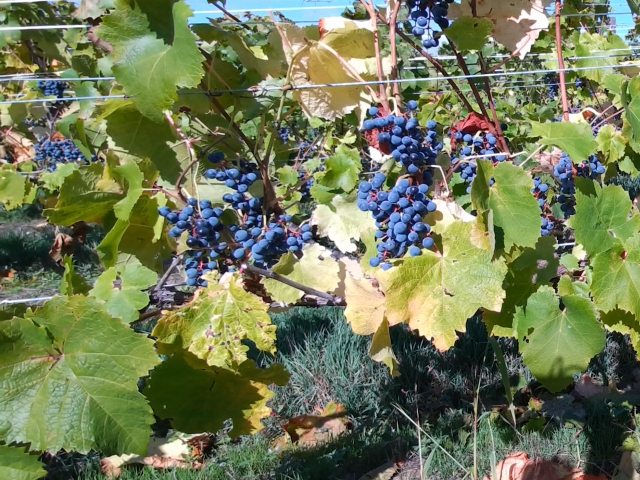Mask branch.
<instances>
[{"instance_id": "obj_10", "label": "branch", "mask_w": 640, "mask_h": 480, "mask_svg": "<svg viewBox=\"0 0 640 480\" xmlns=\"http://www.w3.org/2000/svg\"><path fill=\"white\" fill-rule=\"evenodd\" d=\"M446 39H447V40H448V42L450 43V46L452 47V49H453V51H454V53H455V55H456V58H457V60H458V61H459V63H460V69L464 72V74H470L469 67H468V65L466 64V62L464 61V59H463L462 55H461L460 53H458V54H457V52H456V50H455L456 46H454L453 42H452V41H450V40L447 38V36H446Z\"/></svg>"}, {"instance_id": "obj_3", "label": "branch", "mask_w": 640, "mask_h": 480, "mask_svg": "<svg viewBox=\"0 0 640 480\" xmlns=\"http://www.w3.org/2000/svg\"><path fill=\"white\" fill-rule=\"evenodd\" d=\"M468 83L471 86V89L473 91V95L476 98V101L478 103V105L480 106V109L482 110L483 114L485 115L487 121H488V125H489V133L493 135V137L497 140L496 143V148L498 150H500L503 154H509L510 150L505 142L504 136H503V132L501 130V122L497 117V113H496V105L493 99V94L491 92V86L489 84V77L488 78H484V86L486 89V94L488 96V101L491 107V115L488 111V109L486 108L485 104L482 101V98L478 92V88L475 84V82L472 79L468 80Z\"/></svg>"}, {"instance_id": "obj_7", "label": "branch", "mask_w": 640, "mask_h": 480, "mask_svg": "<svg viewBox=\"0 0 640 480\" xmlns=\"http://www.w3.org/2000/svg\"><path fill=\"white\" fill-rule=\"evenodd\" d=\"M565 74H559V80H560V92H561V102H562V108H563V112H564V120L568 121L569 120V110H568V106H567V99H566V89H565V78H564Z\"/></svg>"}, {"instance_id": "obj_2", "label": "branch", "mask_w": 640, "mask_h": 480, "mask_svg": "<svg viewBox=\"0 0 640 480\" xmlns=\"http://www.w3.org/2000/svg\"><path fill=\"white\" fill-rule=\"evenodd\" d=\"M288 94V90L284 89L281 93V97L279 100V105L278 108L276 110V115L274 118V127H273V133H272V140L270 142V145L267 149L266 155H265V159L264 161H262L259 152L256 150L255 146L250 142V140L246 137V135L242 132V130L240 129V127L236 124L233 123L232 127L235 129V132L237 133V135L242 139V141L247 145V147L249 148V150L253 153L255 160L257 161V164L259 165V169L262 173V176L264 178V181L266 182V184L263 185V203L261 204V208L262 209H267L268 208V193L271 196V200L275 205V212L277 214H281L282 210L280 209V202L277 200V195L275 193V191L272 188L271 185V180L269 179L268 173L267 171L269 170V162H270V157L272 154V151L275 148L276 142H277V135H278V129H279V120L281 117V113L284 107V102L286 99V95Z\"/></svg>"}, {"instance_id": "obj_8", "label": "branch", "mask_w": 640, "mask_h": 480, "mask_svg": "<svg viewBox=\"0 0 640 480\" xmlns=\"http://www.w3.org/2000/svg\"><path fill=\"white\" fill-rule=\"evenodd\" d=\"M449 84L451 85L452 89L454 90L455 94L459 96L460 100L466 105L468 111L470 113L474 112V108L472 107L471 103L466 99V97L464 96L463 92L460 91V89L457 87L456 83L454 80L448 81Z\"/></svg>"}, {"instance_id": "obj_1", "label": "branch", "mask_w": 640, "mask_h": 480, "mask_svg": "<svg viewBox=\"0 0 640 480\" xmlns=\"http://www.w3.org/2000/svg\"><path fill=\"white\" fill-rule=\"evenodd\" d=\"M402 4V0H397L395 6H394V10L393 13L391 15V19L390 21H388L380 12H377L373 9V0H368V5L366 4V2L364 0L360 1V5L366 10L367 13H369L370 19H371V24H372V34H373V46L374 51H375V59H376V64H377V74H378V79L383 78V71H382V61H381V56H380V49L379 47V43H378V32H377V21H376V17L384 24L386 25L388 28H390V44H391V50H392V62H391V67H392V71H393V76L392 78H398V69H397V48H396V34H398L399 37L402 38V40L409 45L411 48H413L414 50H416L417 52H419L422 56H424L425 58H427L434 66H436V68L442 73L443 76H449V73L447 72V70L436 60L434 59V57L429 54L428 52H426L423 48L419 47L416 43L412 42L403 32L401 29H399L398 26H395V21H396V17L399 13V9L401 7Z\"/></svg>"}, {"instance_id": "obj_6", "label": "branch", "mask_w": 640, "mask_h": 480, "mask_svg": "<svg viewBox=\"0 0 640 480\" xmlns=\"http://www.w3.org/2000/svg\"><path fill=\"white\" fill-rule=\"evenodd\" d=\"M309 47H310V44L309 43H305L303 46H301L299 49H297L296 52L291 56L289 65H288L286 73L284 75V84H289V78H290V75H291V72H292V69L294 67L295 60L297 59V57L300 54H302L304 51H306Z\"/></svg>"}, {"instance_id": "obj_9", "label": "branch", "mask_w": 640, "mask_h": 480, "mask_svg": "<svg viewBox=\"0 0 640 480\" xmlns=\"http://www.w3.org/2000/svg\"><path fill=\"white\" fill-rule=\"evenodd\" d=\"M379 91H380V102L382 104V107H383L384 111L387 114H390L391 113V107H390V105L388 103V100H387V92L385 91V86L384 85H380L379 86Z\"/></svg>"}, {"instance_id": "obj_5", "label": "branch", "mask_w": 640, "mask_h": 480, "mask_svg": "<svg viewBox=\"0 0 640 480\" xmlns=\"http://www.w3.org/2000/svg\"><path fill=\"white\" fill-rule=\"evenodd\" d=\"M555 10H556L555 43L558 49L559 68L563 69L564 68L563 46L560 40L561 8L559 3L555 4Z\"/></svg>"}, {"instance_id": "obj_4", "label": "branch", "mask_w": 640, "mask_h": 480, "mask_svg": "<svg viewBox=\"0 0 640 480\" xmlns=\"http://www.w3.org/2000/svg\"><path fill=\"white\" fill-rule=\"evenodd\" d=\"M229 137L228 133L222 134L220 137L214 138L212 139L209 143H207L205 146H203L200 151L195 155V157L191 160V162L189 164H187L185 167H183L176 175L175 177V190H176V194L180 200L181 203H185L186 199L182 194L181 188H180V179L181 177L188 172L197 162L198 160L203 156V154L209 150L212 146H214L215 144L222 142L224 139H227Z\"/></svg>"}, {"instance_id": "obj_12", "label": "branch", "mask_w": 640, "mask_h": 480, "mask_svg": "<svg viewBox=\"0 0 640 480\" xmlns=\"http://www.w3.org/2000/svg\"><path fill=\"white\" fill-rule=\"evenodd\" d=\"M208 98H209L210 102L212 103V105L218 110L220 115L225 119V121L226 122H230L231 118L226 114V112L221 107V105L217 102V100L214 98V96L212 94H209Z\"/></svg>"}, {"instance_id": "obj_11", "label": "branch", "mask_w": 640, "mask_h": 480, "mask_svg": "<svg viewBox=\"0 0 640 480\" xmlns=\"http://www.w3.org/2000/svg\"><path fill=\"white\" fill-rule=\"evenodd\" d=\"M397 89H398V83H393V86H392V94H393V96H394V98H395V100H396L397 114H398L399 116H402V115H403V112H402L401 97H400V95L398 94Z\"/></svg>"}, {"instance_id": "obj_13", "label": "branch", "mask_w": 640, "mask_h": 480, "mask_svg": "<svg viewBox=\"0 0 640 480\" xmlns=\"http://www.w3.org/2000/svg\"><path fill=\"white\" fill-rule=\"evenodd\" d=\"M478 56H479L480 66L482 68V73H486L487 72V65H486L485 60H484V54H483V50L482 49L478 50Z\"/></svg>"}]
</instances>
